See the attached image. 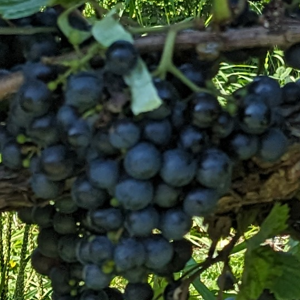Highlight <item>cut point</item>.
<instances>
[{"label":"cut point","instance_id":"1","mask_svg":"<svg viewBox=\"0 0 300 300\" xmlns=\"http://www.w3.org/2000/svg\"><path fill=\"white\" fill-rule=\"evenodd\" d=\"M178 34L179 29L177 27H171L167 32L161 60L156 68V76L163 80L169 73L175 70V65L171 62V56L173 54V48Z\"/></svg>","mask_w":300,"mask_h":300}]
</instances>
